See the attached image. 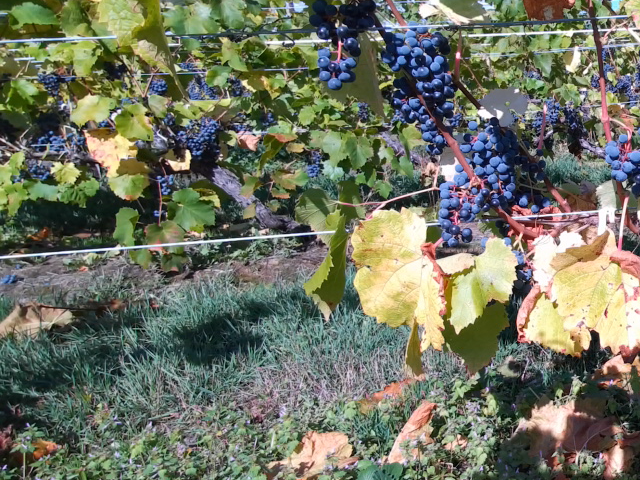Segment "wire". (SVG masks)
<instances>
[{
    "mask_svg": "<svg viewBox=\"0 0 640 480\" xmlns=\"http://www.w3.org/2000/svg\"><path fill=\"white\" fill-rule=\"evenodd\" d=\"M335 233H336L335 229H330V230L314 231V232L257 234L250 237L199 239L194 241H168L165 243L135 245V246H105V247H92L88 249L76 248V249H69V250H54L52 252H27V253H16V254H3V255H0V260L29 258V257H54L56 255L91 254L94 252H108V251L150 250V249H158V248H167L170 246H196L201 244L252 242L260 239H273V238L317 237V236L332 235Z\"/></svg>",
    "mask_w": 640,
    "mask_h": 480,
    "instance_id": "d2f4af69",
    "label": "wire"
},
{
    "mask_svg": "<svg viewBox=\"0 0 640 480\" xmlns=\"http://www.w3.org/2000/svg\"><path fill=\"white\" fill-rule=\"evenodd\" d=\"M630 14L623 15H589L583 17H567V18H536L530 20H510L503 22H494V21H478V22H470V23H450L449 25L441 24V23H425V24H417L412 26H394V25H386L380 27H369V32H383V31H415L419 29H427V28H439L443 30H453L454 28H472V27H480V26H492V27H505L512 25H532L538 23H569V22H586L591 20H599V21H610V20H625L630 19Z\"/></svg>",
    "mask_w": 640,
    "mask_h": 480,
    "instance_id": "a73af890",
    "label": "wire"
},
{
    "mask_svg": "<svg viewBox=\"0 0 640 480\" xmlns=\"http://www.w3.org/2000/svg\"><path fill=\"white\" fill-rule=\"evenodd\" d=\"M289 33H311L317 34L318 30L314 28H287L273 31L252 32V31H198L183 33H167V38H186L201 36H249V37H266Z\"/></svg>",
    "mask_w": 640,
    "mask_h": 480,
    "instance_id": "4f2155b8",
    "label": "wire"
},
{
    "mask_svg": "<svg viewBox=\"0 0 640 480\" xmlns=\"http://www.w3.org/2000/svg\"><path fill=\"white\" fill-rule=\"evenodd\" d=\"M115 35H95V36H70V37H55V38H47V37H32L28 39H0V44L10 45V44H30L34 42H45V43H58V42H73V41H97V40H115Z\"/></svg>",
    "mask_w": 640,
    "mask_h": 480,
    "instance_id": "f0478fcc",
    "label": "wire"
},
{
    "mask_svg": "<svg viewBox=\"0 0 640 480\" xmlns=\"http://www.w3.org/2000/svg\"><path fill=\"white\" fill-rule=\"evenodd\" d=\"M601 209L589 210V211H581L576 210L573 212H548V213H538L532 215H515V220H535L540 218H550V217H575V216H591L601 214Z\"/></svg>",
    "mask_w": 640,
    "mask_h": 480,
    "instance_id": "a009ed1b",
    "label": "wire"
}]
</instances>
